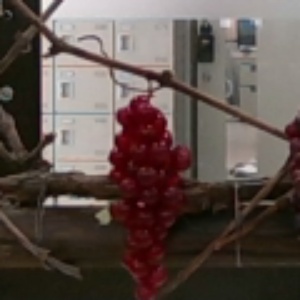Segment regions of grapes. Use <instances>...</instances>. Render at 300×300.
<instances>
[{"label":"grapes","mask_w":300,"mask_h":300,"mask_svg":"<svg viewBox=\"0 0 300 300\" xmlns=\"http://www.w3.org/2000/svg\"><path fill=\"white\" fill-rule=\"evenodd\" d=\"M116 119L122 129L109 153L114 165L109 178L123 198L110 205L109 214L130 230L122 263L139 286L136 300H156L169 278L168 269L159 264L166 257L161 241L187 203L178 172L190 168L191 151L173 145L167 116L148 96L132 98L117 110Z\"/></svg>","instance_id":"01657485"}]
</instances>
